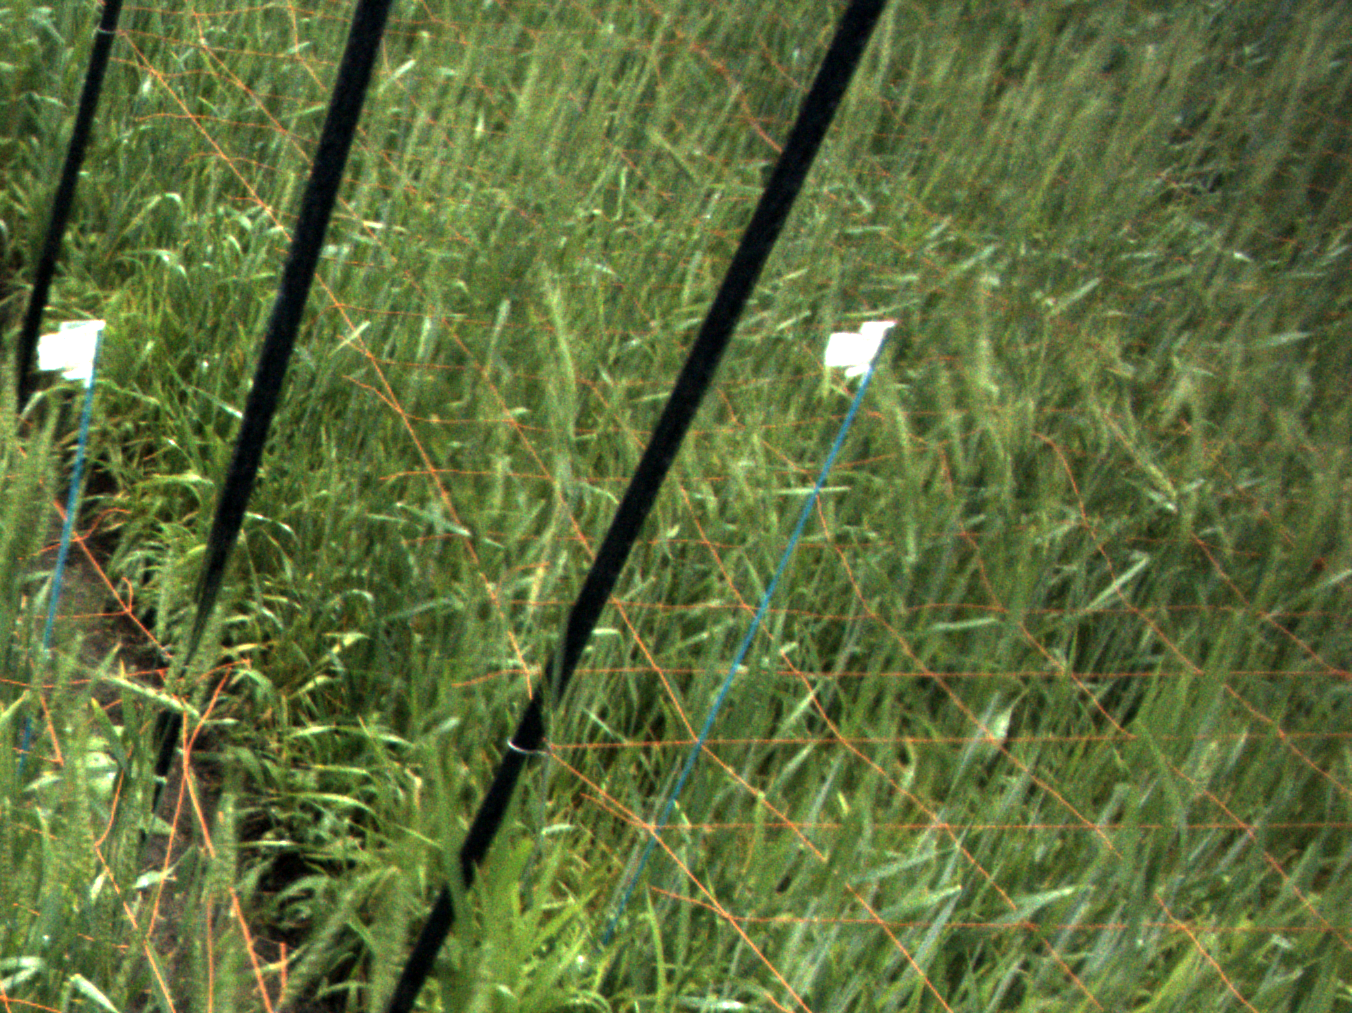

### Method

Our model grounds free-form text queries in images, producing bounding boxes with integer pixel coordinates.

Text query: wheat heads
[163,605,197,690]
[91,881,118,980]
[549,102,571,151]
[117,782,144,902]
[49,629,90,713]
[363,875,406,1013]
[19,471,55,567]
[278,172,297,212]
[728,358,752,415]
[112,918,151,1004]
[1087,401,1109,460]
[828,500,836,543]
[457,941,499,1013]
[187,936,212,1013]
[405,26,438,114]
[32,644,53,715]
[873,9,895,80]
[782,161,833,247]
[427,101,476,195]
[1186,742,1219,797]
[978,422,1003,459]
[962,86,1018,180]
[12,848,40,951]
[751,432,768,478]
[0,793,18,921]
[33,404,56,473]
[214,940,244,1013]
[1010,398,1036,452]
[493,462,507,516]
[0,348,19,455]
[888,398,910,472]
[206,791,238,912]
[0,480,26,665]
[514,60,541,118]
[60,844,82,929]
[770,952,801,1013]
[154,549,173,641]
[0,599,19,674]
[1009,110,1036,169]
[179,601,220,695]
[72,643,122,711]
[403,112,428,159]
[999,452,1017,518]
[69,753,101,880]
[280,879,362,1006]
[42,837,72,897]
[530,307,562,396]
[181,656,217,738]
[0,920,12,1004]
[1218,821,1256,873]
[136,770,156,832]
